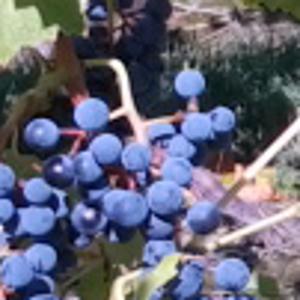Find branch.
<instances>
[{
    "mask_svg": "<svg viewBox=\"0 0 300 300\" xmlns=\"http://www.w3.org/2000/svg\"><path fill=\"white\" fill-rule=\"evenodd\" d=\"M53 46L68 99L72 102L83 101L89 94V85L81 51L75 40L65 31L56 34Z\"/></svg>",
    "mask_w": 300,
    "mask_h": 300,
    "instance_id": "1",
    "label": "branch"
}]
</instances>
